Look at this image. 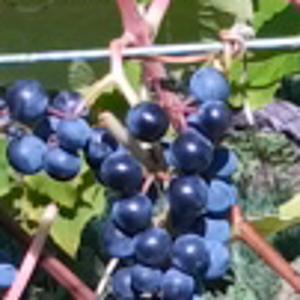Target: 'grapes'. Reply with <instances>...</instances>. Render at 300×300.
Segmentation results:
<instances>
[{"label": "grapes", "instance_id": "b958b902", "mask_svg": "<svg viewBox=\"0 0 300 300\" xmlns=\"http://www.w3.org/2000/svg\"><path fill=\"white\" fill-rule=\"evenodd\" d=\"M17 266L9 253L5 250H0V292H6L11 288L15 281Z\"/></svg>", "mask_w": 300, "mask_h": 300}, {"label": "grapes", "instance_id": "01657485", "mask_svg": "<svg viewBox=\"0 0 300 300\" xmlns=\"http://www.w3.org/2000/svg\"><path fill=\"white\" fill-rule=\"evenodd\" d=\"M188 99L199 104L185 132L165 135L169 120L161 105L134 103L127 129L110 111L89 127L75 116L81 93L63 89L49 101L36 81H12L0 89V109L31 133L9 138L4 159L18 176L43 172L56 182L73 181L83 159L97 180L121 193L109 221L94 228V250L103 262L120 261L108 281L113 300H192L203 282L224 278L232 264L228 211L238 204L229 176L236 158L215 142L232 125L226 103L230 87L214 67L186 80Z\"/></svg>", "mask_w": 300, "mask_h": 300}]
</instances>
